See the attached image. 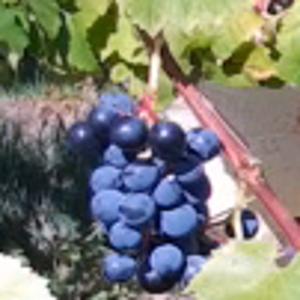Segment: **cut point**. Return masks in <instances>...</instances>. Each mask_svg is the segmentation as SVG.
Here are the masks:
<instances>
[{
	"label": "cut point",
	"mask_w": 300,
	"mask_h": 300,
	"mask_svg": "<svg viewBox=\"0 0 300 300\" xmlns=\"http://www.w3.org/2000/svg\"><path fill=\"white\" fill-rule=\"evenodd\" d=\"M161 64V48L159 46H154L152 48V60L151 66L148 71V82H147V93L143 99L141 107V116L143 118H148L151 123H156L158 121V116L153 103L156 97L157 88L159 87V71Z\"/></svg>",
	"instance_id": "1"
}]
</instances>
